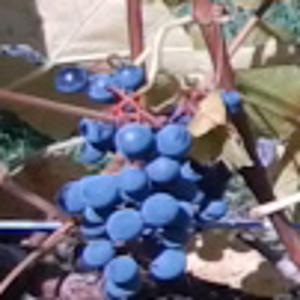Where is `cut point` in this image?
Wrapping results in <instances>:
<instances>
[{
	"mask_svg": "<svg viewBox=\"0 0 300 300\" xmlns=\"http://www.w3.org/2000/svg\"><path fill=\"white\" fill-rule=\"evenodd\" d=\"M195 22L196 17L193 14H178L168 21H163L156 27L152 43L148 46L146 51L139 56L141 63L148 62V69L145 74V86L147 88L154 86V79L157 74V63L161 57V45L165 32L177 28L182 23L194 24Z\"/></svg>",
	"mask_w": 300,
	"mask_h": 300,
	"instance_id": "6a23745f",
	"label": "cut point"
}]
</instances>
